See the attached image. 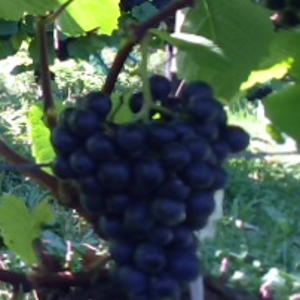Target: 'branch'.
Wrapping results in <instances>:
<instances>
[{"instance_id": "30e6481e", "label": "branch", "mask_w": 300, "mask_h": 300, "mask_svg": "<svg viewBox=\"0 0 300 300\" xmlns=\"http://www.w3.org/2000/svg\"><path fill=\"white\" fill-rule=\"evenodd\" d=\"M0 151L7 158L18 163L35 181H38L43 186L49 188L56 196H59L66 205L76 206L78 204L80 188L71 179L56 181L48 174L39 170L20 153L10 148L4 140H0Z\"/></svg>"}, {"instance_id": "325d2c04", "label": "branch", "mask_w": 300, "mask_h": 300, "mask_svg": "<svg viewBox=\"0 0 300 300\" xmlns=\"http://www.w3.org/2000/svg\"><path fill=\"white\" fill-rule=\"evenodd\" d=\"M190 3V0H175L164 11L152 17L149 21L144 22L139 27L131 22L129 24L130 31L132 32L133 39L127 44V46L117 55L112 67L110 68L106 80L104 81L101 91L107 96L112 94L114 83L119 75L124 62L129 56L131 50L140 42V37L148 32L150 28L155 27L160 21L169 16L177 7L185 6Z\"/></svg>"}, {"instance_id": "170604dd", "label": "branch", "mask_w": 300, "mask_h": 300, "mask_svg": "<svg viewBox=\"0 0 300 300\" xmlns=\"http://www.w3.org/2000/svg\"><path fill=\"white\" fill-rule=\"evenodd\" d=\"M34 32L37 35V43L40 55V72L42 76V105L45 114V121L48 127L57 125V117L54 114L52 87H51V71L49 68V51L47 43V28L42 18L34 21Z\"/></svg>"}]
</instances>
